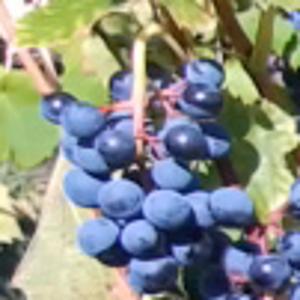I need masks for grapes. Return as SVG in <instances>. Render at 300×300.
<instances>
[{
  "instance_id": "01657485",
  "label": "grapes",
  "mask_w": 300,
  "mask_h": 300,
  "mask_svg": "<svg viewBox=\"0 0 300 300\" xmlns=\"http://www.w3.org/2000/svg\"><path fill=\"white\" fill-rule=\"evenodd\" d=\"M226 83L220 62L188 61L180 76L147 82L146 112L136 118L70 93L42 98L40 115L61 127V155L73 165L59 180L64 200L102 217L78 227V251L126 268L132 290L145 295L177 288L180 266L207 265L196 279L203 300H258L255 288L300 300V230L284 232L269 253L217 231L254 225L256 204L238 186L199 188L187 165L221 161L231 150L226 128L204 121L220 115Z\"/></svg>"
},
{
  "instance_id": "b958b902",
  "label": "grapes",
  "mask_w": 300,
  "mask_h": 300,
  "mask_svg": "<svg viewBox=\"0 0 300 300\" xmlns=\"http://www.w3.org/2000/svg\"><path fill=\"white\" fill-rule=\"evenodd\" d=\"M133 75L129 69H120L108 80L109 97L116 105H125L132 96Z\"/></svg>"
}]
</instances>
